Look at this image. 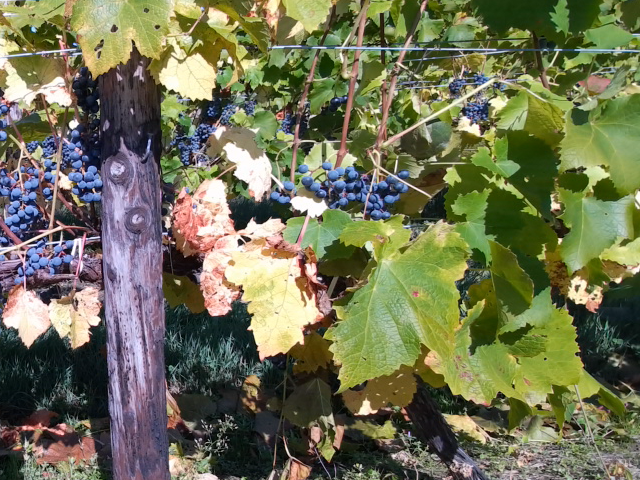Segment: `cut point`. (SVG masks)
<instances>
[{
	"label": "cut point",
	"mask_w": 640,
	"mask_h": 480,
	"mask_svg": "<svg viewBox=\"0 0 640 480\" xmlns=\"http://www.w3.org/2000/svg\"><path fill=\"white\" fill-rule=\"evenodd\" d=\"M292 145H293V142L287 145L286 147L279 149L275 154V168L278 170V172H281V168L278 165V156L280 155L281 152L289 150L292 147Z\"/></svg>",
	"instance_id": "1"
}]
</instances>
